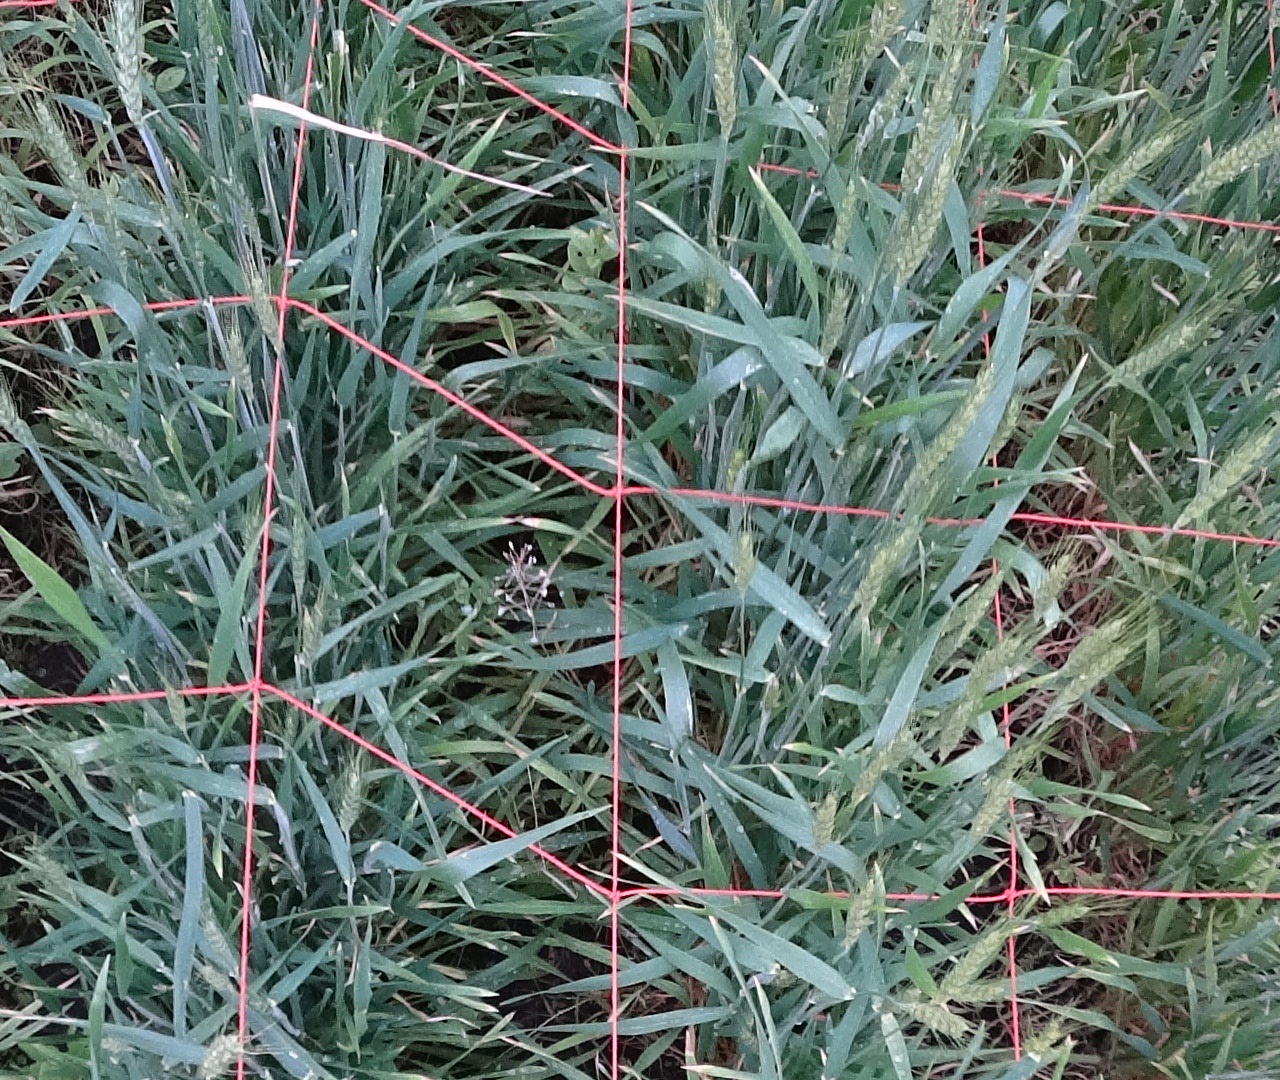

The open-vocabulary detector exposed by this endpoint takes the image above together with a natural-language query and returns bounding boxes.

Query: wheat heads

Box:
[214,331,260,400]
[32,94,77,194]
[726,528,751,591]
[33,845,74,897]
[704,231,726,317]
[898,158,961,267]
[99,180,127,271]
[176,207,210,271]
[292,606,321,666]
[1179,435,1269,529]
[1084,127,1164,217]
[1051,639,1124,724]
[706,17,748,129]
[969,639,1020,686]
[192,0,220,63]
[248,261,280,349]
[823,443,863,504]
[892,57,967,183]
[805,789,844,855]
[886,990,973,1037]
[1034,555,1079,614]
[951,562,1000,631]
[1112,323,1199,388]
[851,1,907,65]
[82,412,140,468]
[760,673,779,716]
[1029,901,1084,930]
[291,519,307,585]
[855,724,916,797]
[332,769,360,829]
[151,674,187,735]
[102,564,143,614]
[854,557,892,611]
[936,928,999,992]
[1191,124,1280,192]
[190,964,229,998]
[102,2,139,112]
[45,741,89,786]
[1056,617,1130,687]
[1031,1018,1068,1059]
[720,450,743,497]
[904,364,1014,497]
[199,912,236,968]
[942,705,969,748]
[974,778,1012,826]
[814,56,850,144]
[818,294,848,358]
[825,180,862,258]
[847,874,885,954]
[205,1032,240,1073]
